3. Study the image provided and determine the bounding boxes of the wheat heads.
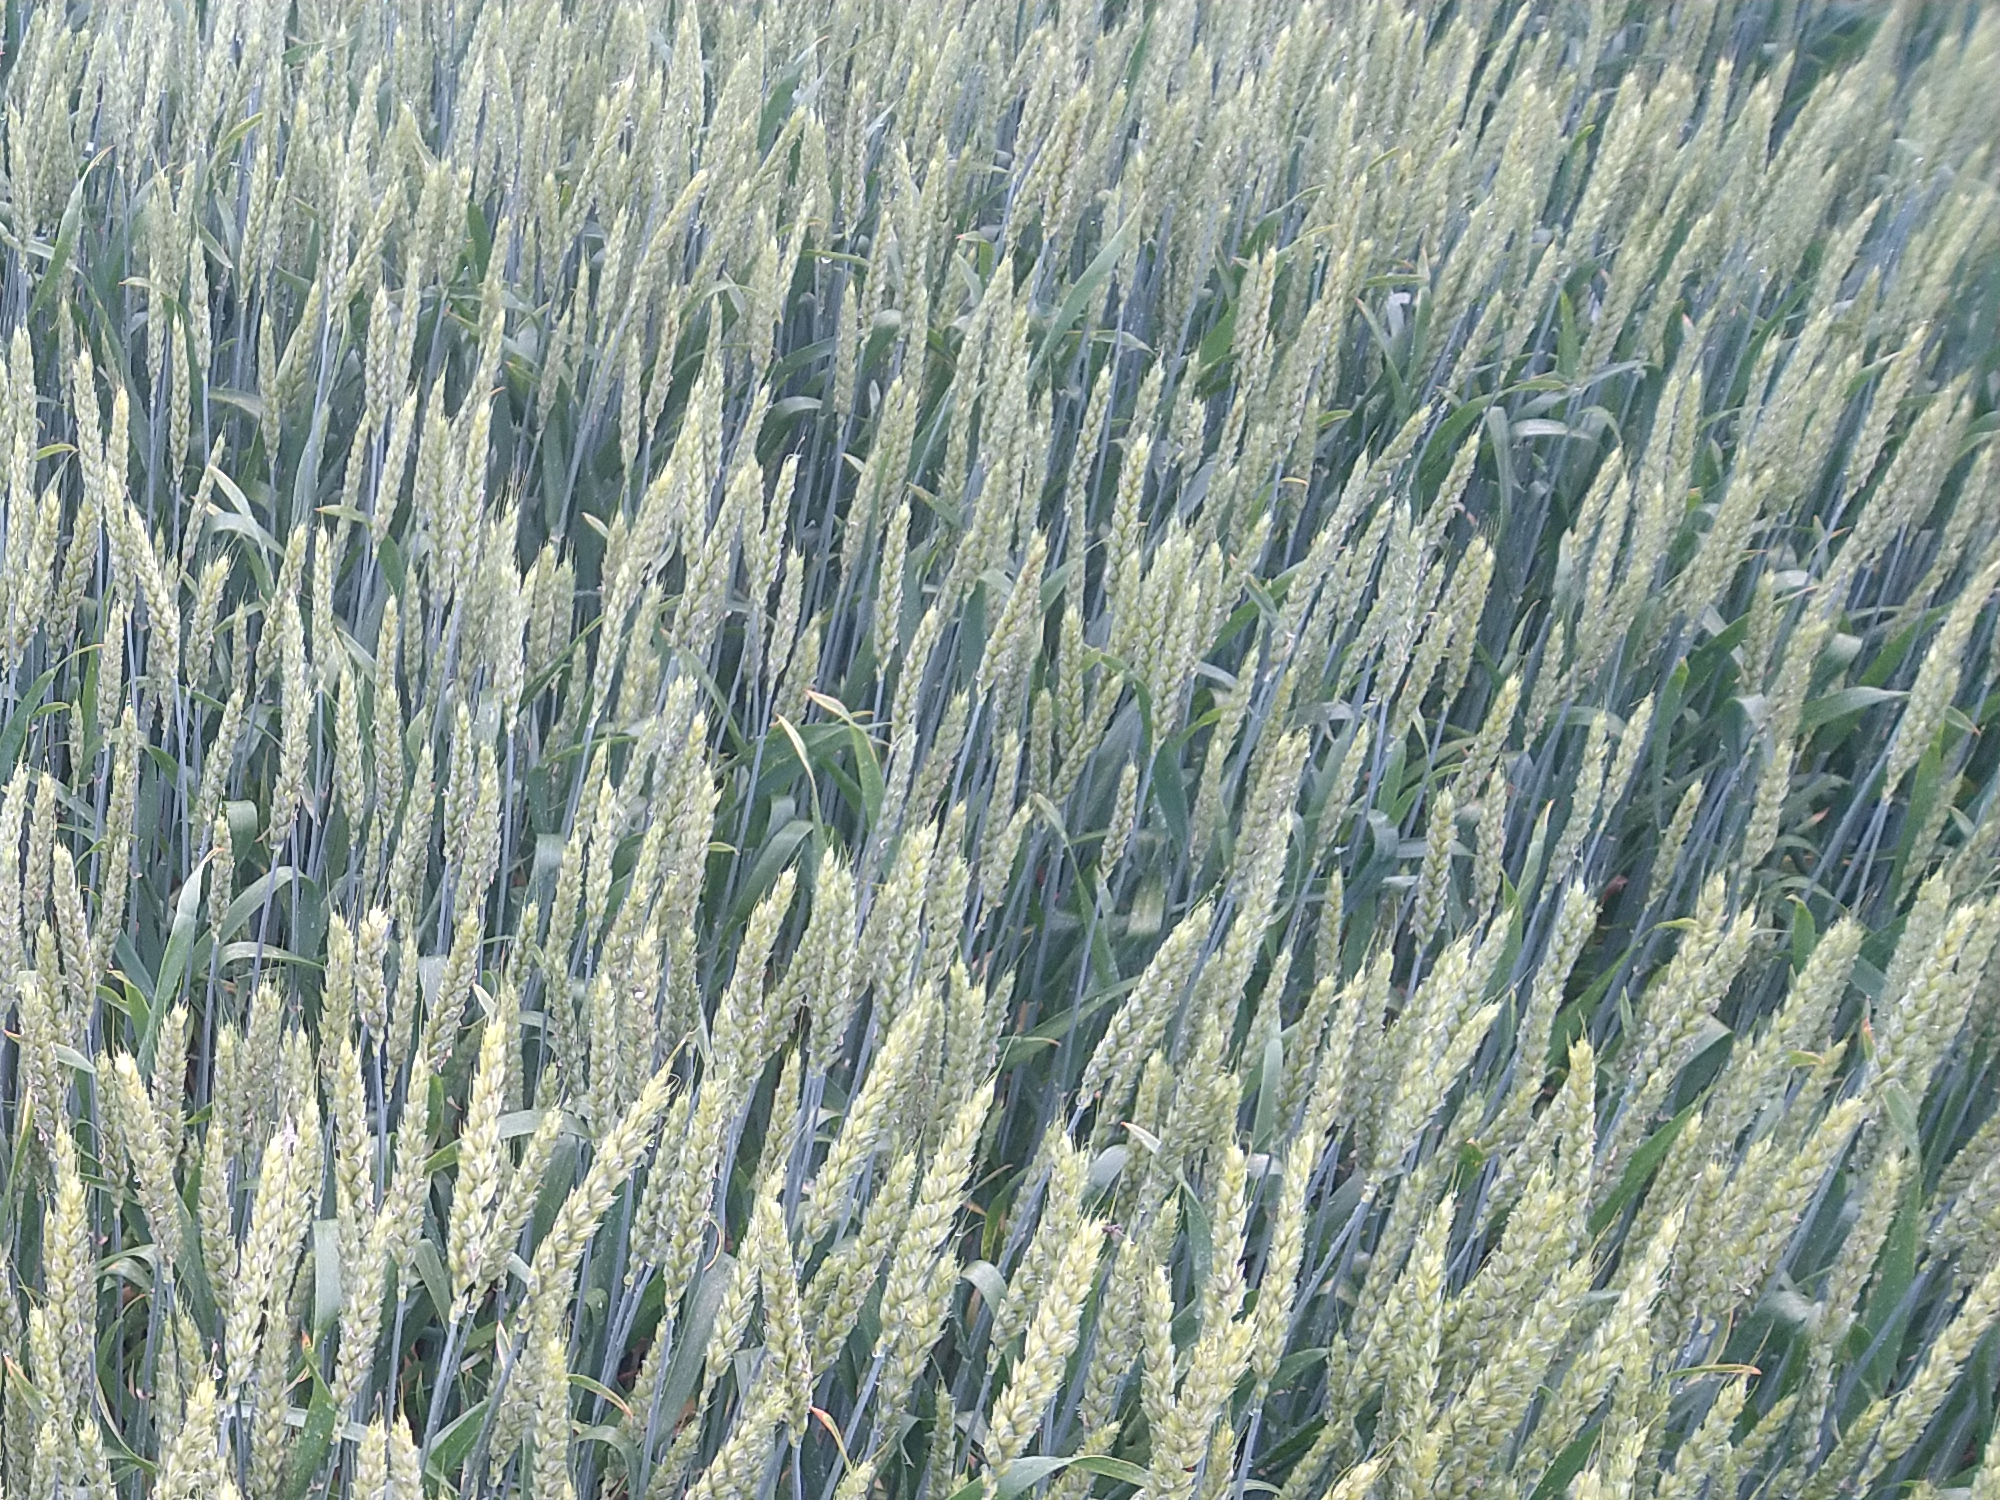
[191,239,212,366]
[270,1101,320,1307]
[25,1426,58,1500]
[1857,410,1939,527]
[1732,1398,1796,1472]
[775,196,815,306]
[571,259,588,367]
[1601,695,1655,824]
[860,214,892,330]
[1755,925,1862,1062]
[938,988,985,1123]
[1431,208,1486,309]
[529,546,558,669]
[1220,517,1271,614]
[875,1260,959,1436]
[98,605,125,734]
[1581,478,1631,634]
[1740,574,1775,687]
[1132,550,1171,680]
[373,395,418,539]
[1233,738,1299,866]
[1229,430,1264,547]
[1808,199,1880,316]
[1240,252,1277,386]
[110,388,129,488]
[181,436,226,568]
[781,620,821,724]
[1058,607,1085,752]
[251,1137,288,1253]
[1007,1431,1118,1500]
[923,861,971,987]
[1643,169,1699,270]
[808,885,857,1066]
[279,1029,293,1117]
[49,1177,91,1330]
[1441,1268,1592,1440]
[1126,365,1164,443]
[1278,309,1323,445]
[1739,337,1779,436]
[1508,201,1536,298]
[650,682,698,797]
[874,504,912,663]
[13,495,63,645]
[978,1102,1005,1173]
[1189,473,1237,550]
[1253,1140,1315,1375]
[6,436,32,572]
[552,562,575,658]
[1066,369,1112,500]
[1705,1112,1861,1305]
[1934,448,1991,564]
[52,846,93,1015]
[1140,1080,1226,1210]
[592,566,632,706]
[759,867,838,1022]
[503,989,523,1110]
[812,1265,879,1372]
[178,1315,206,1392]
[255,528,307,675]
[925,804,967,911]
[728,387,772,484]
[988,1156,1090,1358]
[536,314,568,427]
[892,610,939,737]
[1436,540,1485,618]
[1501,244,1559,380]
[93,838,130,976]
[760,458,799,585]
[1603,1430,1647,1500]
[552,958,575,1066]
[456,405,491,588]
[1352,1448,1442,1500]
[1322,453,1369,543]
[341,187,399,302]
[1105,439,1150,592]
[1898,777,1963,897]
[390,1419,433,1500]
[904,290,929,395]
[345,1423,388,1500]
[752,111,805,194]
[1885,669,1961,791]
[1665,373,1703,530]
[1030,690,1053,796]
[868,734,917,866]
[1757,1408,1889,1500]
[157,1321,182,1462]
[619,936,661,1104]
[706,1237,762,1377]
[1475,770,1507,917]
[1572,449,1623,544]
[1736,744,1794,896]
[801,1035,911,1234]
[1768,79,1834,178]
[533,1342,570,1500]
[284,283,323,403]
[1093,1023,1164,1150]
[1648,783,1703,900]
[1609,1208,1646,1287]
[1874,876,1951,1015]
[705,363,725,484]
[313,529,334,668]
[375,596,398,714]
[586,784,617,935]
[798,1155,864,1258]
[76,351,104,503]
[454,755,501,923]
[105,472,134,607]
[1051,679,1123,800]
[595,210,629,332]
[1247,670,1297,788]
[319,926,354,1078]
[1142,1266,1175,1421]
[1621,1116,1701,1259]
[903,695,968,832]
[1418,435,1481,548]
[1594,1074,1669,1198]
[170,317,190,473]
[1414,792,1457,946]
[1137,1326,1260,1500]
[984,360,1029,465]
[1629,556,1706,665]
[1292,555,1352,665]
[1196,545,1224,654]
[1776,1043,1846,1149]
[1513,889,1600,1085]
[29,1309,65,1422]
[4,1375,34,1500]
[1207,1076,1241,1188]
[239,149,268,294]
[114,1060,183,1257]
[1337,955,1394,1116]
[624,1095,690,1281]
[712,881,793,1024]
[1152,589,1201,746]
[1257,1425,1341,1500]
[1863,1274,2000,1468]
[673,474,748,641]
[335,1041,372,1212]
[840,452,880,575]
[441,170,473,277]
[392,257,421,396]
[690,186,749,291]
[1015,52,1057,155]
[46,509,96,646]
[929,1386,956,1500]
[1480,1087,1572,1221]
[1334,504,1392,629]
[980,311,1029,440]
[1563,116,1645,258]
[250,1310,291,1500]
[703,60,748,162]
[570,744,610,845]
[1394,916,1511,1024]
[642,1424,702,1500]
[1176,955,1222,1062]
[961,465,1006,590]
[757,1052,802,1182]
[1845,332,1923,491]
[1866,1373,1957,1475]
[547,840,582,962]
[1081,1245,1141,1432]
[1370,567,1445,692]
[76,41,102,149]
[1825,1159,1900,1308]
[1076,919,1207,1099]
[1327,1334,1349,1415]
[1283,398,1319,526]
[1942,1473,2000,1500]
[852,1158,917,1270]
[972,974,1016,1088]
[13,148,26,253]
[1302,979,1366,1133]
[668,1397,788,1500]
[868,830,936,1023]
[879,394,920,521]
[1771,313,1831,407]
[1618,921,1756,1085]
[1881,566,1999,792]
[979,734,1021,866]
[1425,1097,1484,1188]
[488,1315,557,1471]
[226,1138,287,1361]
[447,1024,508,1277]
[36,922,65,1021]
[1951,1212,2000,1298]
[1443,556,1494,700]
[1938,824,1997,903]
[0,875,25,984]
[1542,715,1609,892]
[1690,876,1728,951]
[832,284,858,428]
[884,1092,994,1322]
[1110,554,1143,658]
[1018,433,1050,546]
[705,296,722,381]
[480,217,511,332]
[1392,619,1452,733]
[1239,816,1292,955]
[1702,512,1757,608]
[149,1386,220,1500]
[260,181,286,289]
[1336,601,1389,696]
[495,574,534,724]
[1315,868,1343,982]
[1635,377,1679,501]
[1932,1113,2000,1204]
[385,937,419,1086]
[259,314,279,453]
[1238,952,1291,1080]
[1448,678,1522,806]
[357,912,390,1035]
[414,168,438,257]
[334,670,363,831]
[662,1084,725,1299]
[1787,1345,1835,1475]
[390,1056,431,1272]
[849,887,896,994]
[1575,266,1644,375]
[78,1423,124,1500]
[186,560,229,682]
[1606,996,1646,1089]
[683,428,707,561]
[1925,1159,2000,1261]
[981,806,1032,913]
[632,172,706,293]
[452,63,485,165]
[1525,624,1565,741]
[1865,913,1980,1083]
[628,1318,670,1425]
[661,715,709,831]
[331,1225,388,1435]
[1110,1054,1162,1220]
[1921,563,1999,675]
[934,534,977,622]
[0,766,28,855]
[617,585,663,718]
[475,99,498,202]
[529,1081,672,1298]
[799,1256,843,1325]
[1925,903,2000,1062]
[426,915,481,1065]
[269,696,313,847]
[1701,61,1732,142]
[1717,1140,1774,1227]
[1273,978,1335,1132]
[153,1007,188,1155]
[189,691,245,863]
[1218,650,1260,753]
[1268,539,1332,664]
[807,1163,917,1362]
[199,1129,232,1302]
[1203,1145,1248,1339]
[760,1212,810,1431]
[387,749,434,903]
[713,901,772,1079]
[614,724,658,818]
[244,994,283,1130]
[984,1226,1105,1480]
[1230,256,1261,349]
[365,288,391,427]
[1445,1187,1563,1332]
[414,380,444,521]
[598,822,663,975]
[1312,725,1370,861]
[213,1029,234,1141]
[95,1055,126,1204]
[979,536,1047,683]
[1385,944,1469,1055]
[1676,1383,1746,1474]
[28,1014,59,1184]
[1349,1204,1455,1394]
[24,775,56,933]
[601,513,627,601]
[444,705,474,853]
[663,774,720,935]
[622,336,641,465]
[1911,401,1974,517]
[1373,1012,1500,1168]
[1364,409,1432,495]
[334,413,372,546]
[18,984,39,1086]
[1174,1021,1223,1144]
[506,905,539,990]
[1771,665,1812,747]
[645,316,679,430]
[1556,1041,1598,1203]
[1005,1123,1064,1237]
[210,817,234,930]
[1885,547,1962,641]
[1190,741,1224,866]
[661,930,698,1051]
[1636,217,1711,357]
[737,1171,784,1284]
[624,471,677,587]
[1007,106,1079,238]
[768,551,805,682]
[293,1030,313,1113]
[1169,354,1200,442]
[375,688,403,828]
[1212,395,1247,483]
[589,976,618,1137]
[1445,294,1504,393]
[468,1115,565,1292]
[1666,885,1727,990]
[1598,76,1637,164]
[1100,765,1139,873]
[751,242,778,369]
[1197,938,1254,1024]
